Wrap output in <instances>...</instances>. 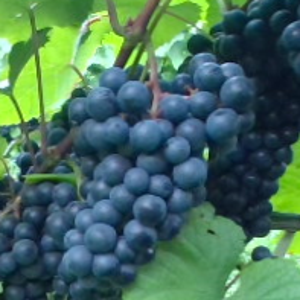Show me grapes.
<instances>
[{
    "mask_svg": "<svg viewBox=\"0 0 300 300\" xmlns=\"http://www.w3.org/2000/svg\"><path fill=\"white\" fill-rule=\"evenodd\" d=\"M124 69L105 70L98 87L68 110L88 208L65 235L54 292L105 300L154 257L153 243L182 230L179 211L206 199V147L226 154L251 130L256 83L211 53L191 58L173 81L146 86Z\"/></svg>",
    "mask_w": 300,
    "mask_h": 300,
    "instance_id": "obj_1",
    "label": "grapes"
}]
</instances>
